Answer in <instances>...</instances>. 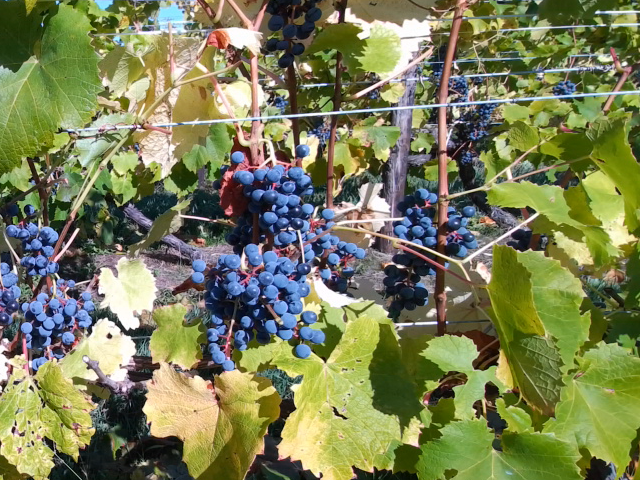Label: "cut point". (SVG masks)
<instances>
[{
    "label": "cut point",
    "instance_id": "6a23745f",
    "mask_svg": "<svg viewBox=\"0 0 640 480\" xmlns=\"http://www.w3.org/2000/svg\"><path fill=\"white\" fill-rule=\"evenodd\" d=\"M38 200L40 202V207L39 210L37 212V219L41 220L42 219V214L44 213V209H45V199L43 196H39Z\"/></svg>",
    "mask_w": 640,
    "mask_h": 480
}]
</instances>
